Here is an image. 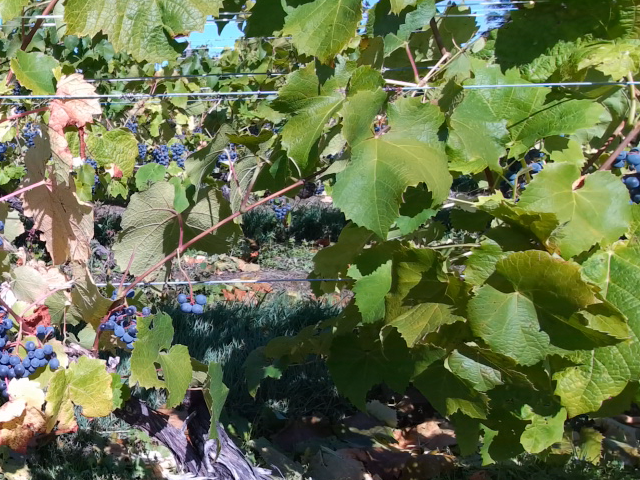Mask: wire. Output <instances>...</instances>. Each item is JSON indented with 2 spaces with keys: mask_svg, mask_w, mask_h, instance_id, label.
<instances>
[{
  "mask_svg": "<svg viewBox=\"0 0 640 480\" xmlns=\"http://www.w3.org/2000/svg\"><path fill=\"white\" fill-rule=\"evenodd\" d=\"M278 95L279 91L275 89H257L251 91H203L199 90L192 93H134V94H94V93H79V94H62V95H49V94H32V95H0V100H34V99H47V100H75L81 98L91 99H136V98H195L198 96H254V95Z\"/></svg>",
  "mask_w": 640,
  "mask_h": 480,
  "instance_id": "d2f4af69",
  "label": "wire"
},
{
  "mask_svg": "<svg viewBox=\"0 0 640 480\" xmlns=\"http://www.w3.org/2000/svg\"><path fill=\"white\" fill-rule=\"evenodd\" d=\"M630 85L640 86L639 80L619 81H585V82H537V83H509V84H490V83H470L464 84V89L472 88H488V89H512V88H539V87H588V86H616L625 87Z\"/></svg>",
  "mask_w": 640,
  "mask_h": 480,
  "instance_id": "a73af890",
  "label": "wire"
},
{
  "mask_svg": "<svg viewBox=\"0 0 640 480\" xmlns=\"http://www.w3.org/2000/svg\"><path fill=\"white\" fill-rule=\"evenodd\" d=\"M352 277L346 278H279V279H221V280H191V285H241V284H281V283H349Z\"/></svg>",
  "mask_w": 640,
  "mask_h": 480,
  "instance_id": "4f2155b8",
  "label": "wire"
},
{
  "mask_svg": "<svg viewBox=\"0 0 640 480\" xmlns=\"http://www.w3.org/2000/svg\"><path fill=\"white\" fill-rule=\"evenodd\" d=\"M535 3V0L525 1H497V2H478V3H436V8H480V7H499V6H527Z\"/></svg>",
  "mask_w": 640,
  "mask_h": 480,
  "instance_id": "f0478fcc",
  "label": "wire"
},
{
  "mask_svg": "<svg viewBox=\"0 0 640 480\" xmlns=\"http://www.w3.org/2000/svg\"><path fill=\"white\" fill-rule=\"evenodd\" d=\"M236 23V24H248L249 20L248 19H239V18H231V17H225V18H208L205 20L206 24H211V23Z\"/></svg>",
  "mask_w": 640,
  "mask_h": 480,
  "instance_id": "a009ed1b",
  "label": "wire"
}]
</instances>
